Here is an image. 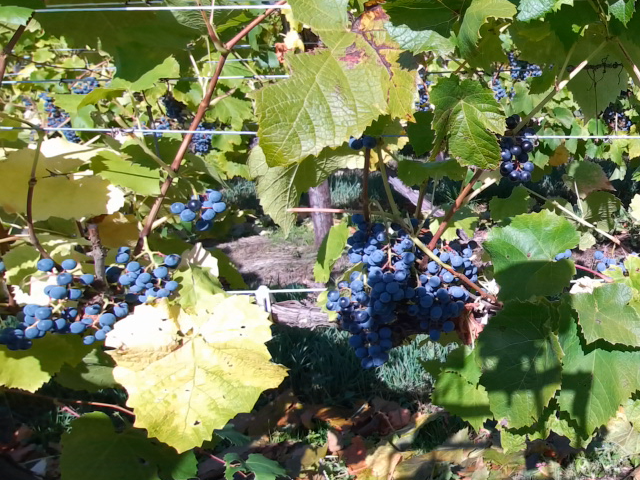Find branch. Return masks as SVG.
Segmentation results:
<instances>
[{"instance_id":"982ccf7c","label":"branch","mask_w":640,"mask_h":480,"mask_svg":"<svg viewBox=\"0 0 640 480\" xmlns=\"http://www.w3.org/2000/svg\"><path fill=\"white\" fill-rule=\"evenodd\" d=\"M610 44V41L608 39H605L603 42L598 43L594 49L592 50V52L590 53V55L581 63H579L578 65L574 66L565 76V79L563 82H561L559 85H556L553 90L551 91L550 95L543 101L541 102L536 108H534L525 118H523L512 130H511V134L513 136H516L522 128H524L528 123H530L534 117H536L539 113H541L547 106H549L557 97V95L559 94V92H561L563 89H567L570 85V83L572 82V78L573 76L582 71L584 68H586L587 66H589L597 57V55L599 54V52L605 48H607Z\"/></svg>"},{"instance_id":"30e6481e","label":"branch","mask_w":640,"mask_h":480,"mask_svg":"<svg viewBox=\"0 0 640 480\" xmlns=\"http://www.w3.org/2000/svg\"><path fill=\"white\" fill-rule=\"evenodd\" d=\"M483 175L481 170H478L470 183H468L453 199L452 207L449 209L447 216L443 218V220L439 223L437 230L434 236L429 240L427 245L423 241V239L418 236L414 226L404 217H402L399 213L393 212L391 210L385 209L389 218L398 221L402 224L408 231L410 238L413 242H416L419 248L422 250L423 255L420 261V267L425 269L427 267L429 258L433 260L436 264H438L443 270H445L450 275L455 278L461 280L469 289L474 290L475 292L483 295L486 298H489L493 303L498 301V297L491 291L486 290L485 288L479 286L478 284L472 282L465 274L461 273L457 269L448 265L444 260H442L437 254H435L432 250L435 244L440 240L447 224L454 218L456 212L459 210V204L464 199V197L468 194L469 191L474 189L478 184Z\"/></svg>"},{"instance_id":"45aa463d","label":"branch","mask_w":640,"mask_h":480,"mask_svg":"<svg viewBox=\"0 0 640 480\" xmlns=\"http://www.w3.org/2000/svg\"><path fill=\"white\" fill-rule=\"evenodd\" d=\"M192 137H184L182 140V144L177 149L174 154L172 166L169 169L168 174L165 177V181L162 183L161 189L159 191L158 197L155 200L152 208L149 211L148 217L146 219L145 227L138 233L137 239L134 244V252L133 256L138 258L141 255V247L144 241V237L149 234L152 230L153 221L155 219L156 213L159 210L161 204L164 202L166 193L168 191L169 185L172 183V180L179 168V164L181 161V157L184 151L190 146Z\"/></svg>"},{"instance_id":"170604dd","label":"branch","mask_w":640,"mask_h":480,"mask_svg":"<svg viewBox=\"0 0 640 480\" xmlns=\"http://www.w3.org/2000/svg\"><path fill=\"white\" fill-rule=\"evenodd\" d=\"M275 12H266L265 14L261 15L259 18H257L254 22L248 24L247 26H245L244 28H242L241 30H239L237 32V34H234L224 45V47L222 48V51L220 53L219 59L217 60V62L215 63V66L212 70V72L210 73V78H209V82L207 84V89L206 92L204 94V97L201 101V103L198 105L196 112L193 115V118L191 120V123L189 125V129L190 130H195L198 122L201 118V115L203 114L205 108L207 107L208 103L210 102L211 96L213 95L214 92V86L216 85V80H217V76L219 74V72L221 71L222 66L224 65L228 53L230 51V49L232 48V46L239 41L242 37H244L247 33L251 32L252 30L258 28L262 23L266 22Z\"/></svg>"},{"instance_id":"325d2c04","label":"branch","mask_w":640,"mask_h":480,"mask_svg":"<svg viewBox=\"0 0 640 480\" xmlns=\"http://www.w3.org/2000/svg\"><path fill=\"white\" fill-rule=\"evenodd\" d=\"M371 167L372 150H365L364 165V199L363 209H350L341 207H297L289 205L287 210L295 214H339L348 216H363L366 221L371 219V215H379L377 208H370L371 201Z\"/></svg>"}]
</instances>
